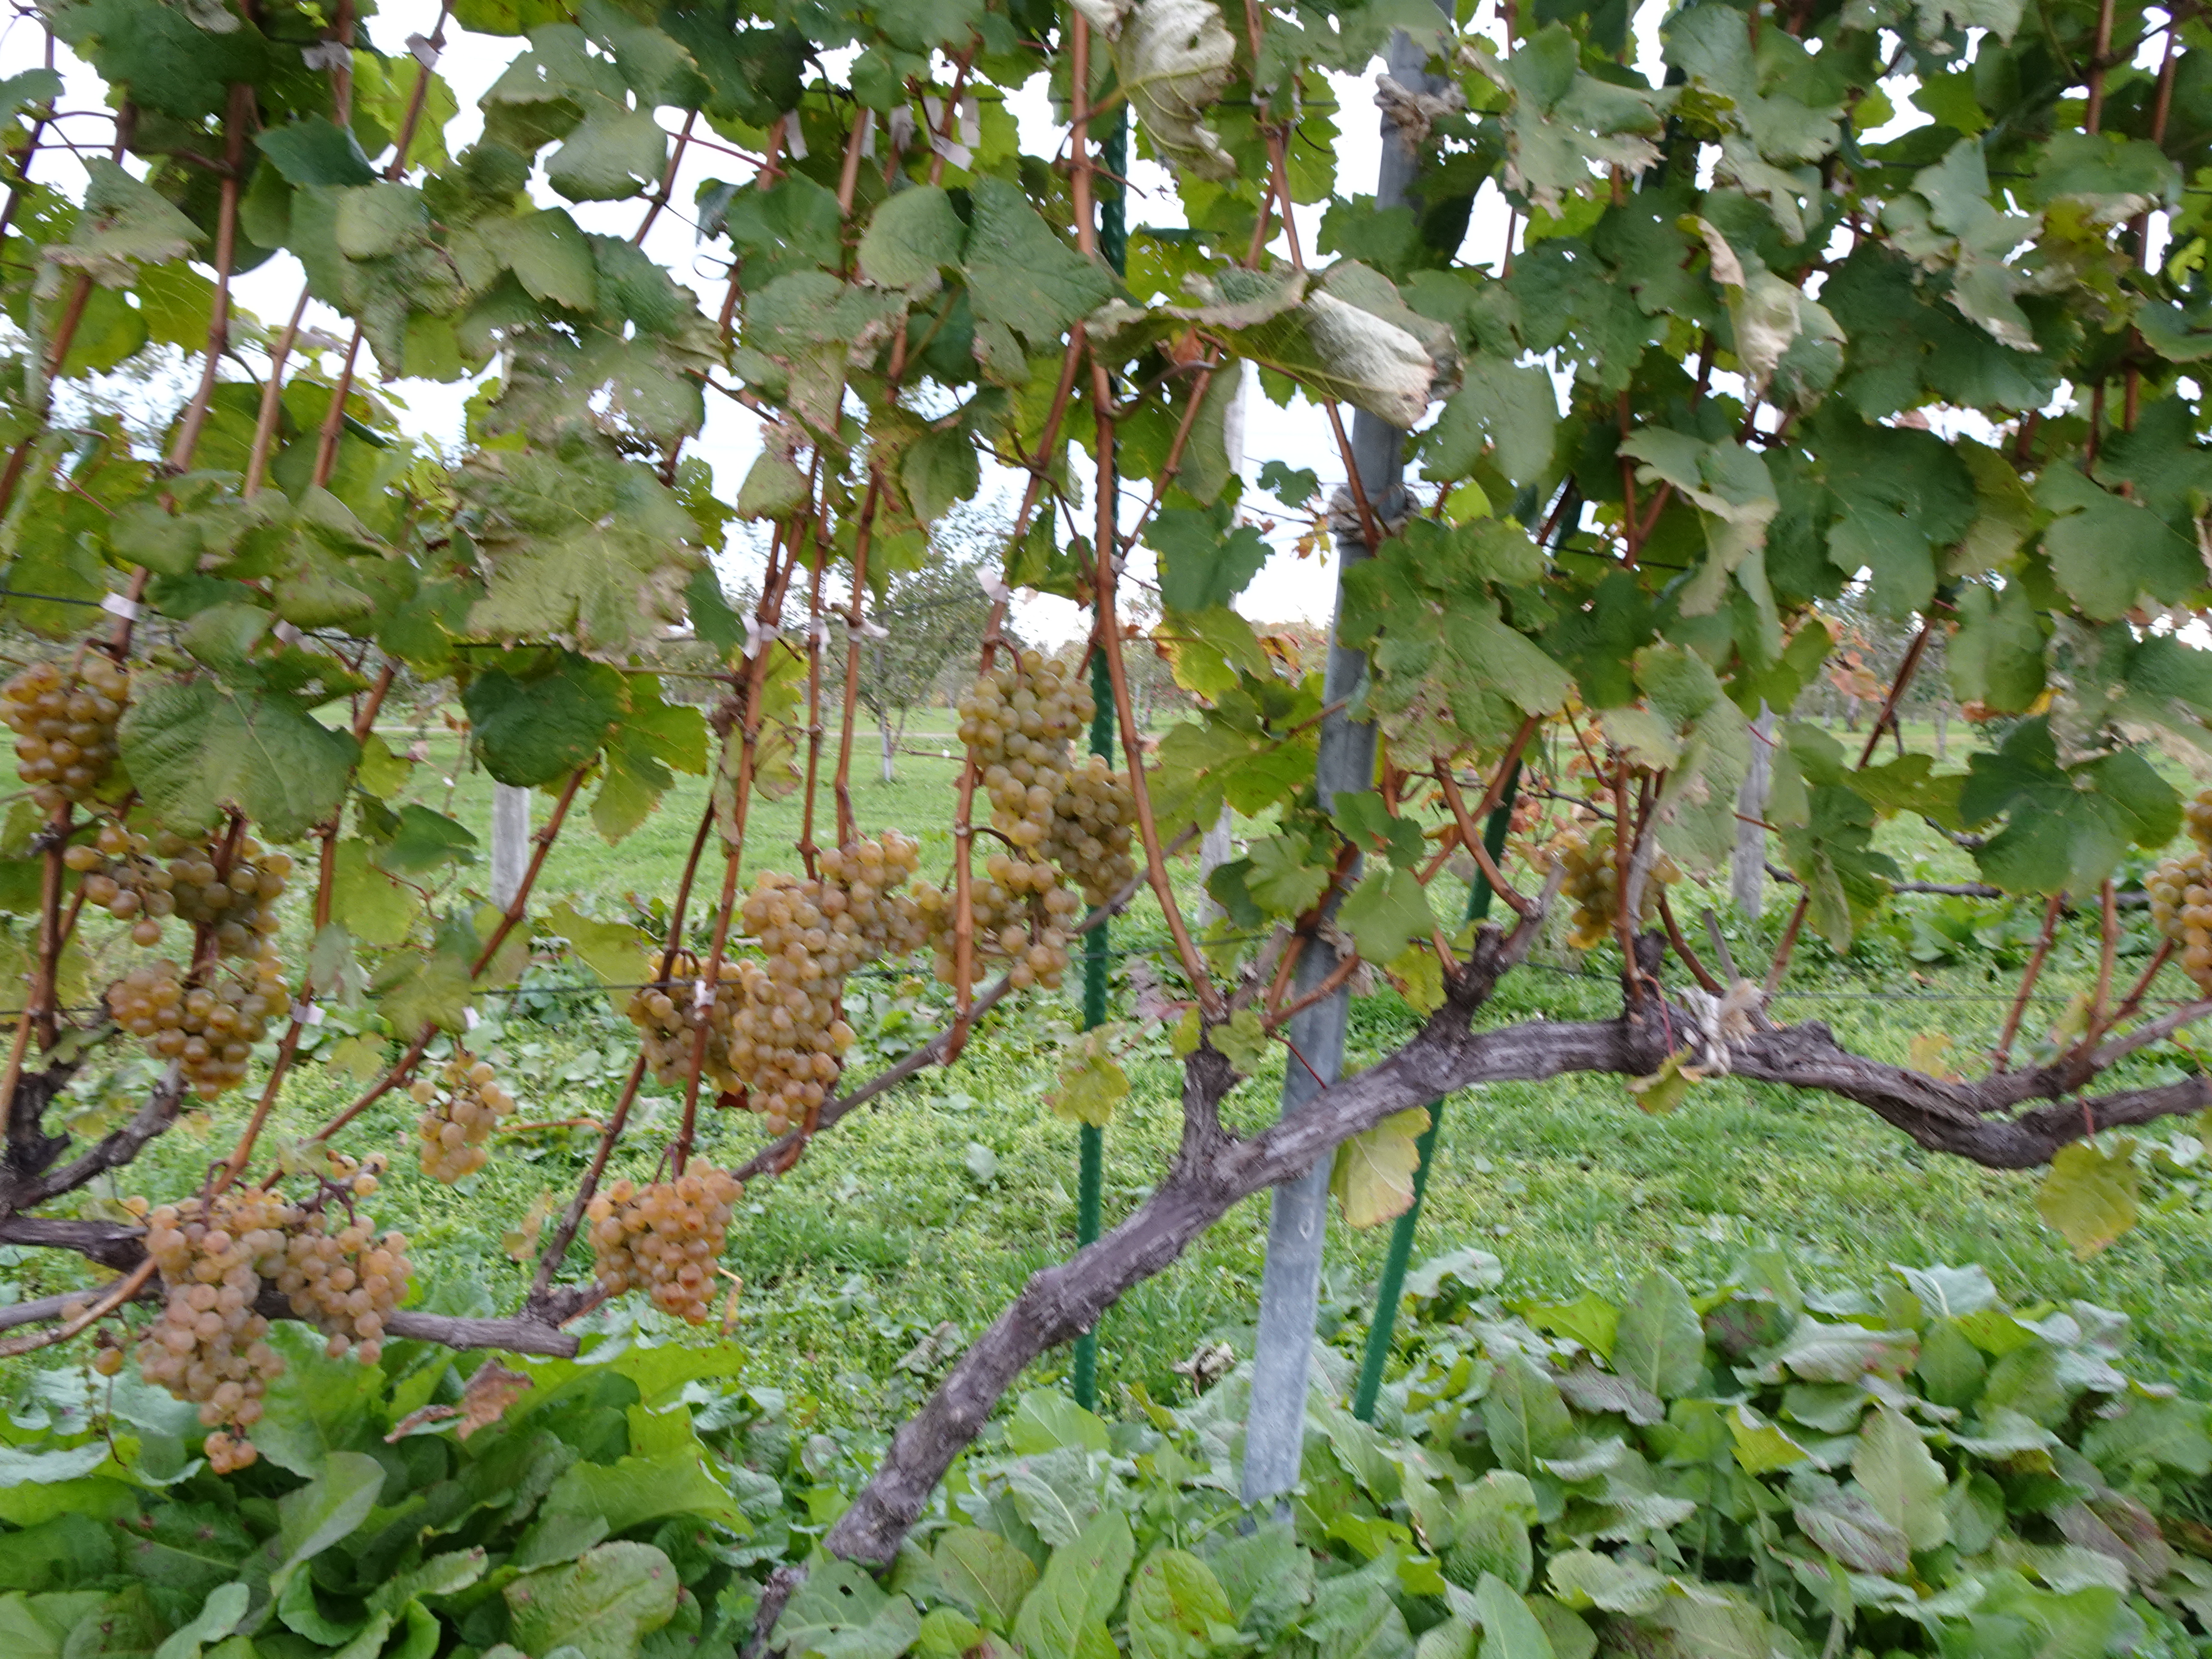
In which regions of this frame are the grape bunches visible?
[0,646,130,821]
[124,1179,297,1341]
[1549,827,1622,941]
[741,869,865,997]
[57,1300,126,1375]
[2144,849,2211,981]
[645,947,754,1095]
[584,1177,654,1297]
[106,954,291,1103]
[1050,752,1148,914]
[64,824,178,945]
[973,853,1093,992]
[260,1148,413,1365]
[819,828,920,927]
[410,1049,516,1186]
[958,650,1097,861]
[871,893,952,955]
[641,1154,741,1325]
[134,1314,297,1474]
[1597,836,1683,922]
[728,970,858,1137]
[912,877,997,981]
[153,829,294,962]
[631,962,729,1087]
